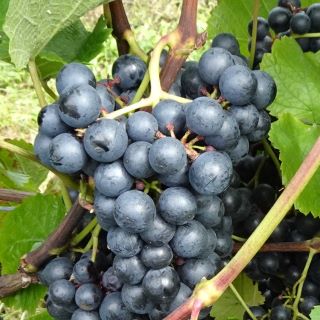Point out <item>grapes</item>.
Instances as JSON below:
<instances>
[{"label": "grapes", "mask_w": 320, "mask_h": 320, "mask_svg": "<svg viewBox=\"0 0 320 320\" xmlns=\"http://www.w3.org/2000/svg\"><path fill=\"white\" fill-rule=\"evenodd\" d=\"M291 6L301 1L280 0L267 19L257 17L253 70L228 32L198 62H184L167 93L193 100L186 106L166 99L95 121L121 109L117 96L132 104L153 49L146 62L119 56L113 79L96 82L82 63L57 74L60 97L39 111L34 152L77 185L94 177V210L77 235L95 217L100 231L95 266L92 252H74L71 264L66 249L39 269L55 320H163L233 258L231 235L248 239L269 213L285 189L271 156L256 189L241 183L255 176L264 151L250 145L278 120L266 110L277 86L259 63L271 53L269 28L320 33V2L295 15Z\"/></svg>", "instance_id": "obj_1"}, {"label": "grapes", "mask_w": 320, "mask_h": 320, "mask_svg": "<svg viewBox=\"0 0 320 320\" xmlns=\"http://www.w3.org/2000/svg\"><path fill=\"white\" fill-rule=\"evenodd\" d=\"M310 251H258L242 270L248 277L258 281L260 291L265 301L263 305L249 307L255 318L261 320L268 309L272 310L271 320H293L294 311L282 307L288 299H279L282 291L293 293L294 284L300 280Z\"/></svg>", "instance_id": "obj_2"}, {"label": "grapes", "mask_w": 320, "mask_h": 320, "mask_svg": "<svg viewBox=\"0 0 320 320\" xmlns=\"http://www.w3.org/2000/svg\"><path fill=\"white\" fill-rule=\"evenodd\" d=\"M312 238H320V217L313 218L312 212L305 216L293 204L266 243L303 242Z\"/></svg>", "instance_id": "obj_3"}, {"label": "grapes", "mask_w": 320, "mask_h": 320, "mask_svg": "<svg viewBox=\"0 0 320 320\" xmlns=\"http://www.w3.org/2000/svg\"><path fill=\"white\" fill-rule=\"evenodd\" d=\"M301 298L303 302L298 303V312L310 318L313 306L320 305V253L314 254L306 279L302 286Z\"/></svg>", "instance_id": "obj_4"}, {"label": "grapes", "mask_w": 320, "mask_h": 320, "mask_svg": "<svg viewBox=\"0 0 320 320\" xmlns=\"http://www.w3.org/2000/svg\"><path fill=\"white\" fill-rule=\"evenodd\" d=\"M296 41L304 53L312 51L315 54L320 50V37H300L296 38Z\"/></svg>", "instance_id": "obj_5"}, {"label": "grapes", "mask_w": 320, "mask_h": 320, "mask_svg": "<svg viewBox=\"0 0 320 320\" xmlns=\"http://www.w3.org/2000/svg\"><path fill=\"white\" fill-rule=\"evenodd\" d=\"M211 311H212V306L211 307H204V308L200 309L198 320H214L216 317L210 316Z\"/></svg>", "instance_id": "obj_6"}, {"label": "grapes", "mask_w": 320, "mask_h": 320, "mask_svg": "<svg viewBox=\"0 0 320 320\" xmlns=\"http://www.w3.org/2000/svg\"><path fill=\"white\" fill-rule=\"evenodd\" d=\"M168 52L165 49H162L160 55V67H164Z\"/></svg>", "instance_id": "obj_7"}, {"label": "grapes", "mask_w": 320, "mask_h": 320, "mask_svg": "<svg viewBox=\"0 0 320 320\" xmlns=\"http://www.w3.org/2000/svg\"><path fill=\"white\" fill-rule=\"evenodd\" d=\"M68 193L72 203L74 204L79 192L75 189H69Z\"/></svg>", "instance_id": "obj_8"}, {"label": "grapes", "mask_w": 320, "mask_h": 320, "mask_svg": "<svg viewBox=\"0 0 320 320\" xmlns=\"http://www.w3.org/2000/svg\"><path fill=\"white\" fill-rule=\"evenodd\" d=\"M243 320H252V318L248 315L246 311L244 312Z\"/></svg>", "instance_id": "obj_9"}, {"label": "grapes", "mask_w": 320, "mask_h": 320, "mask_svg": "<svg viewBox=\"0 0 320 320\" xmlns=\"http://www.w3.org/2000/svg\"><path fill=\"white\" fill-rule=\"evenodd\" d=\"M294 301H295V298H292L291 302H288L287 305H292L293 306Z\"/></svg>", "instance_id": "obj_10"}, {"label": "grapes", "mask_w": 320, "mask_h": 320, "mask_svg": "<svg viewBox=\"0 0 320 320\" xmlns=\"http://www.w3.org/2000/svg\"><path fill=\"white\" fill-rule=\"evenodd\" d=\"M298 287H299V283L297 284V286H296V288H295V296H297Z\"/></svg>", "instance_id": "obj_11"}, {"label": "grapes", "mask_w": 320, "mask_h": 320, "mask_svg": "<svg viewBox=\"0 0 320 320\" xmlns=\"http://www.w3.org/2000/svg\"><path fill=\"white\" fill-rule=\"evenodd\" d=\"M62 201H63V203H64V200H63V198H62ZM65 205V204H64Z\"/></svg>", "instance_id": "obj_12"}]
</instances>
